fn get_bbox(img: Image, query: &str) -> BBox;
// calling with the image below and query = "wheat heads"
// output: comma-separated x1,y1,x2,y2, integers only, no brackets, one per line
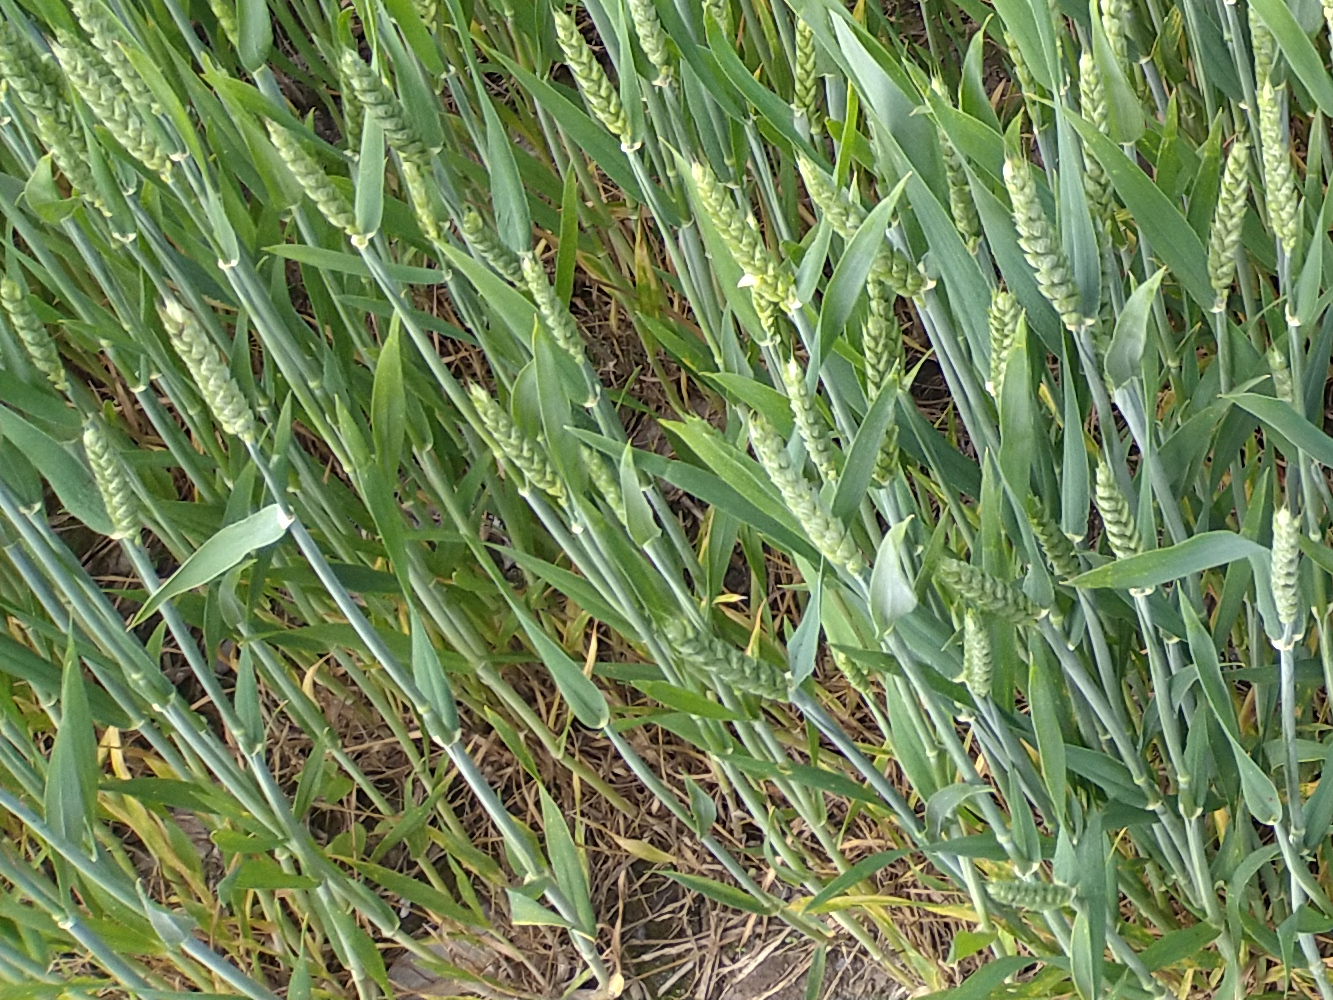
831,652,873,693
518,258,585,356
57,0,164,109
991,292,1020,409
1234,9,1284,81
461,211,533,297
610,0,675,63
553,11,626,139
1021,494,1079,584
867,105,895,217
866,284,903,484
575,439,629,526
36,123,104,213
1030,0,1066,73
801,158,924,295
672,618,791,708
1094,0,1127,79
1317,0,1333,108
0,274,66,389
1266,346,1291,409
471,383,569,520
1092,230,1117,332
988,871,1076,913
1259,84,1299,252
1002,158,1080,326
80,422,140,548
0,21,110,164
755,289,785,340
156,302,254,441
931,550,1036,624
1209,144,1248,290
748,422,871,585
1267,513,1297,624
339,39,429,172
1078,56,1112,252
1006,27,1042,129
690,160,798,307
266,120,361,246
1090,460,1162,594
47,31,164,172
966,611,989,699
796,12,825,138
680,0,732,44
931,86,978,240
207,0,242,57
